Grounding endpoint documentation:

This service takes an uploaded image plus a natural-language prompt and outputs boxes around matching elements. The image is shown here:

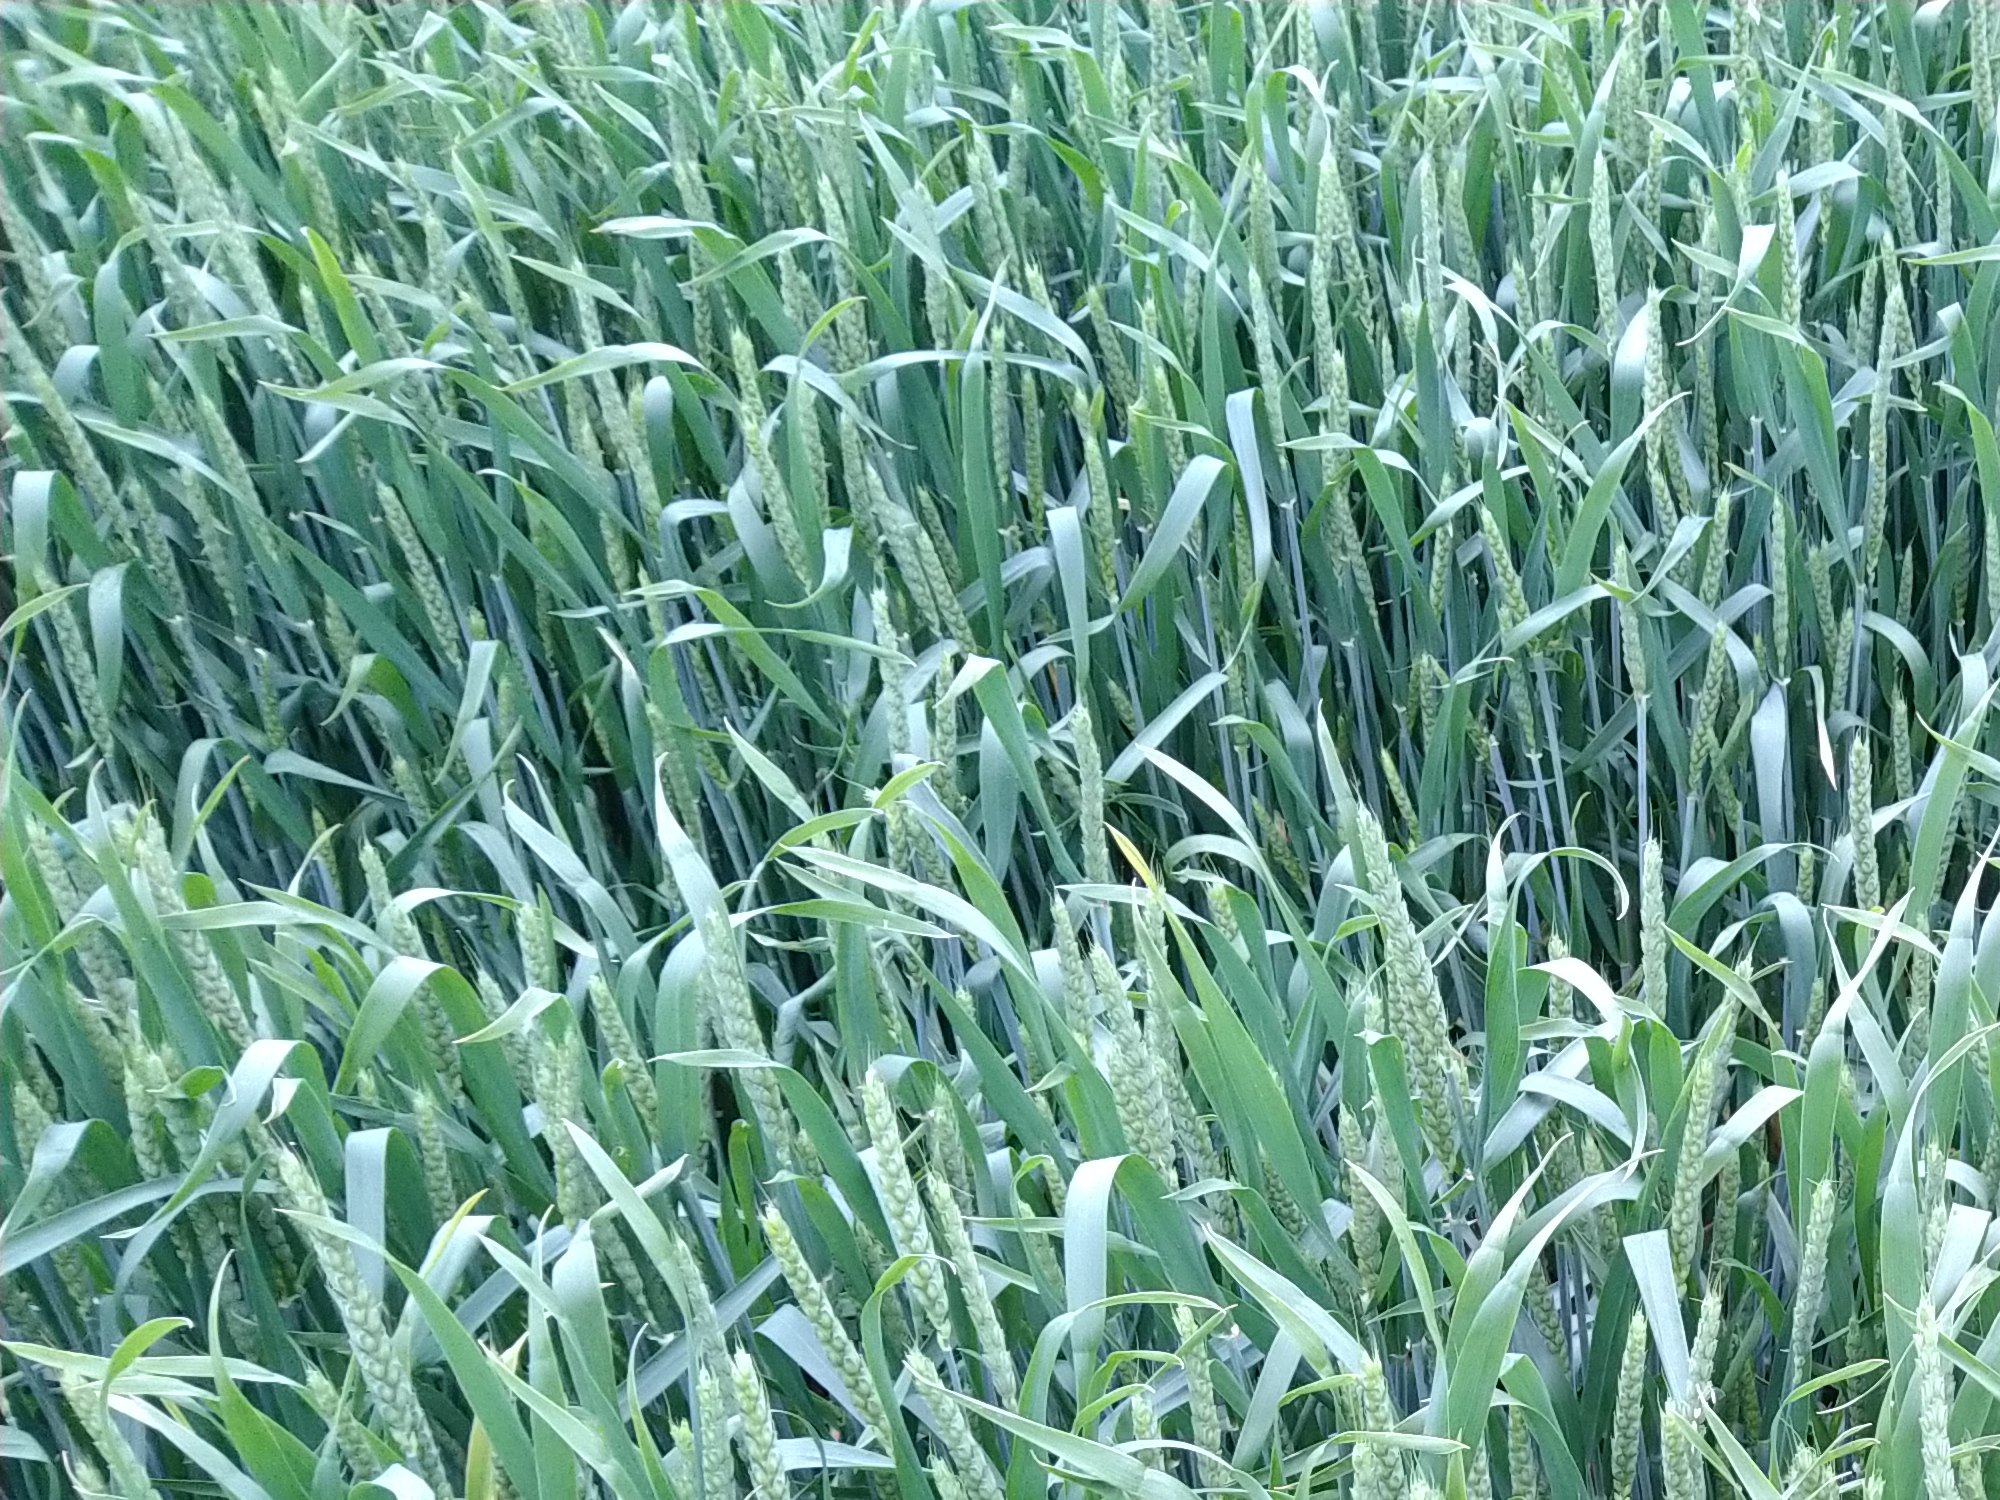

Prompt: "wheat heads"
[253,1198,301,1290]
[1922,1147,1946,1270]
[1465,1440,1496,1500]
[1687,628,1727,784]
[1132,1395,1164,1470]
[1895,292,1921,393]
[366,879,466,1099]
[760,159,783,235]
[1662,1406,1698,1500]
[200,397,278,557]
[1953,524,1970,618]
[1612,1313,1649,1500]
[61,1376,162,1500]
[1525,1259,1571,1376]
[1040,1155,1069,1216]
[65,988,126,1082]
[1511,260,1534,337]
[930,125,959,196]
[1039,748,1083,818]
[1748,1316,1760,1441]
[361,848,450,1024]
[534,553,556,663]
[906,1356,1028,1500]
[653,77,669,143]
[1087,290,1139,414]
[697,242,739,322]
[1831,610,1855,712]
[925,268,951,354]
[1957,1454,2000,1500]
[1406,666,1418,729]
[1642,294,1669,472]
[742,421,816,589]
[1251,164,1282,314]
[1661,406,1693,511]
[684,161,716,222]
[1717,1471,1733,1500]
[1249,272,1285,452]
[325,597,358,673]
[1887,69,1898,210]
[599,511,635,597]
[573,264,605,351]
[1376,886,1458,1165]
[1649,470,1679,551]
[1512,261,1539,414]
[270,69,315,153]
[820,125,856,217]
[1838,1139,1854,1213]
[11,1086,81,1216]
[313,808,343,903]
[303,160,344,258]
[1797,847,1814,906]
[1446,170,1480,283]
[1311,249,1334,391]
[1893,698,1912,803]
[777,112,823,230]
[674,1241,730,1373]
[1017,1202,1067,1305]
[1163,2,1197,77]
[1696,213,1718,331]
[861,1079,952,1335]
[1905,918,1932,1074]
[130,482,186,614]
[731,331,767,426]
[1966,1016,1992,1096]
[1108,679,1139,733]
[1360,1359,1409,1500]
[41,1188,93,1309]
[587,698,615,764]
[1777,172,1802,327]
[1696,345,1718,462]
[1154,367,1190,482]
[491,1452,526,1500]
[1854,875,1879,926]
[1879,232,1919,378]
[587,977,659,1133]
[592,1213,653,1322]
[1508,1406,1541,1500]
[760,1214,893,1445]
[1499,612,1534,748]
[1062,53,1110,186]
[1931,801,1960,899]
[1788,1450,1847,1500]
[24,826,141,1024]
[1545,510,1565,568]
[1019,1026,1051,1124]
[124,1071,168,1182]
[778,250,833,348]
[141,617,177,703]
[0,1275,63,1366]
[552,1048,584,1221]
[1126,1051,1177,1180]
[839,412,878,550]
[12,1085,58,1170]
[1025,199,1041,262]
[1849,740,1881,912]
[661,854,684,913]
[1085,438,1118,596]
[560,2,598,91]
[667,80,699,158]
[377,486,463,662]
[1091,957,1176,1175]
[1897,545,1913,628]
[1982,1120,2000,1191]
[390,91,422,164]
[183,472,236,601]
[146,1053,205,1172]
[692,725,728,784]
[167,108,229,213]
[413,1097,457,1226]
[501,254,532,330]
[1477,345,1495,416]
[818,175,854,292]
[1357,816,1453,1023]
[372,202,425,283]
[872,591,911,754]
[186,1202,262,1361]
[531,1033,557,1116]
[23,1038,63,1119]
[1140,299,1157,390]
[798,380,830,521]
[890,895,925,982]
[1176,1307,1222,1500]
[1701,495,1732,606]
[1257,1146,1306,1240]
[962,19,981,103]
[1614,548,1647,691]
[1584,1137,1619,1252]
[627,389,663,542]
[1,189,69,357]
[900,807,980,953]
[1987,511,2000,623]
[1741,1361,1762,1441]
[1994,351,2000,471]
[1544,334,1564,441]
[688,641,727,722]
[390,760,468,896]
[146,377,191,444]
[1224,638,1247,744]
[1712,1149,1741,1266]
[464,298,523,382]
[1970,2,1993,123]
[1206,884,1242,950]
[640,566,667,640]
[698,1371,739,1500]
[1234,496,1254,592]
[577,1463,602,1500]
[648,706,705,853]
[1148,150,1164,224]
[885,807,922,970]
[1340,1115,1382,1290]
[664,751,705,854]
[1140,887,1179,1065]
[966,153,1022,287]
[1328,353,1352,482]
[874,1395,907,1500]
[1335,95,1357,214]
[932,1086,973,1210]
[633,261,663,339]
[1670,1060,1715,1296]
[451,742,474,789]
[700,2,739,85]
[1429,477,1454,612]
[1334,490,1376,612]
[1070,708,1112,897]
[869,948,905,1051]
[1857,259,1880,363]
[1198,57,1218,185]
[1688,176,1709,238]
[1354,1,1383,88]
[1150,1056,1216,1175]
[1353,1442,1386,1500]
[691,253,714,370]
[1545,39,1582,114]
[1936,145,1951,249]
[594,370,636,467]
[1296,5,1320,131]
[1590,151,1620,340]
[957,986,977,1023]
[1252,801,1308,890]
[778,251,804,326]
[529,132,552,183]
[1815,102,1834,237]
[1808,546,1837,662]
[521,382,557,441]
[1534,1121,1567,1199]
[1371,1081,1406,1204]
[1533,180,1555,328]
[932,656,960,811]
[1792,1182,1836,1386]
[1709,966,1750,1096]
[1589,1,1606,86]
[1751,1161,1769,1261]
[1112,54,1130,124]
[256,653,287,749]
[1688,1293,1724,1418]
[1380,749,1423,842]
[299,285,332,355]
[1421,163,1444,342]
[1149,1,1171,139]
[770,48,795,107]
[1107,1045,1147,1161]
[251,86,288,156]
[1551,1119,1584,1195]
[12,331,138,537]
[1129,414,1158,520]
[516,906,555,995]
[1329,164,1370,319]
[818,178,869,369]
[1801,979,1826,1053]
[1772,498,1788,663]
[917,489,964,587]
[127,191,213,330]
[133,820,254,1024]
[1434,101,1452,196]
[406,1385,460,1500]
[1010,87,1028,193]
[1710,738,1740,826]
[1845,1317,1866,1428]
[1549,936,1573,1055]
[1866,391,1887,565]
[534,2,589,108]
[1731,1,1748,92]
[498,677,518,780]
[1645,128,1664,228]
[989,329,1012,491]
[393,759,432,828]
[36,570,114,753]
[795,271,839,366]
[426,1413,469,1476]
[1687,1428,1705,1500]
[52,1236,94,1310]
[1052,897,1093,1048]
[354,271,437,420]
[1420,657,1438,745]
[424,217,454,308]
[1884,107,1919,251]
[478,975,535,1097]
[703,915,793,1166]
[1642,839,1669,1020]
[564,377,600,468]
[1456,301,1471,399]
[749,117,796,229]
[1026,267,1075,400]
[354,270,413,368]
[305,1373,381,1482]
[1539,1469,1563,1500]
[670,1423,700,1500]
[865,468,937,626]
[930,1178,1021,1408]
[261,1149,461,1500]
[1021,368,1045,533]
[1916,1296,1961,1500]
[1649,471,1691,584]
[13,1090,97,1307]
[1617,59,1639,177]
[1480,510,1533,641]
[733,1362,809,1500]
[915,531,975,651]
